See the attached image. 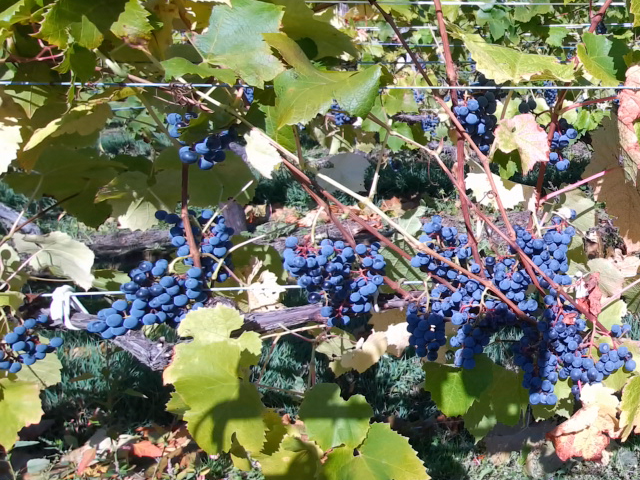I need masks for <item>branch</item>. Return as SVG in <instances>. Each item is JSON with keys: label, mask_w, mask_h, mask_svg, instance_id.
Here are the masks:
<instances>
[{"label": "branch", "mask_w": 640, "mask_h": 480, "mask_svg": "<svg viewBox=\"0 0 640 480\" xmlns=\"http://www.w3.org/2000/svg\"><path fill=\"white\" fill-rule=\"evenodd\" d=\"M283 164L288 169L291 170V173L293 174L295 179L301 184L303 191L306 194H308L310 197L314 198L318 206L320 207V209L324 211L332 219V221L335 223L340 233L343 235L344 239L352 247H355L357 245V242L351 236V234L349 233V231L347 230V228L345 227L341 219L338 217V215L335 212H333L328 205H326L322 196L325 199L331 201L341 213H347L350 217H352L360 228H363L367 230L369 233H371L372 235H375L381 240H384L397 254L404 256L408 260H411L413 258V255L409 251H407L405 248L400 247L392 237L380 231L378 228H375L371 224L363 221L361 216L356 211H354L351 207L347 206L346 204H342V202L335 195L329 193L315 180H313L311 177H309L305 173L301 172L299 168L290 160L285 159L283 161Z\"/></svg>", "instance_id": "325d2c04"}, {"label": "branch", "mask_w": 640, "mask_h": 480, "mask_svg": "<svg viewBox=\"0 0 640 480\" xmlns=\"http://www.w3.org/2000/svg\"><path fill=\"white\" fill-rule=\"evenodd\" d=\"M545 167H546V161L542 160L541 164L539 166V175H538V180H537V184H536L537 194H536L535 207H539V199H540V196H541V187H542V183H543Z\"/></svg>", "instance_id": "1d269e1b"}, {"label": "branch", "mask_w": 640, "mask_h": 480, "mask_svg": "<svg viewBox=\"0 0 640 480\" xmlns=\"http://www.w3.org/2000/svg\"><path fill=\"white\" fill-rule=\"evenodd\" d=\"M610 3H611V0H605L604 1L603 5L601 6L600 10L598 11L596 17L594 18V20H593V22H592V24H591V26L589 28L590 32H593L596 29L598 22L601 20L602 15L604 14L605 10L607 9V7H608V5Z\"/></svg>", "instance_id": "1af6ec82"}, {"label": "branch", "mask_w": 640, "mask_h": 480, "mask_svg": "<svg viewBox=\"0 0 640 480\" xmlns=\"http://www.w3.org/2000/svg\"><path fill=\"white\" fill-rule=\"evenodd\" d=\"M190 90L196 94L199 95L201 98H205L210 102H213L215 105L219 106L221 109H223L224 111H227L228 113H230L236 120L242 122L243 124H246L248 127H250L252 130L256 131L257 133L261 134L263 137H265L271 144L274 145V147L276 149H278L279 151L285 153L291 160L295 161L296 163L300 162V158L297 157L296 155H294L290 150H288L287 148H285L284 146L280 145L278 143L277 140H275L271 135H269L265 130L261 129L259 126L253 124L250 120L244 118L243 116H240L236 111H234L232 108H230L229 106L225 105L224 103H222L221 101H219L218 99H216L215 97L210 96L207 93H203L202 91L198 90L196 87H190Z\"/></svg>", "instance_id": "45aa463d"}, {"label": "branch", "mask_w": 640, "mask_h": 480, "mask_svg": "<svg viewBox=\"0 0 640 480\" xmlns=\"http://www.w3.org/2000/svg\"><path fill=\"white\" fill-rule=\"evenodd\" d=\"M374 6L376 7L377 11L380 13L381 16L385 17L388 22L391 24L394 33L397 34V37L399 39V41L402 43V45L404 46L406 53L408 55V57L410 58V60L412 61V63L415 65V67L417 68V70L419 71V73L421 74V76L423 77V79L425 80L426 84L428 85H433L432 81L430 80L428 74L425 72L424 68L420 65L419 61L417 60V58L414 56L410 45L408 44V42L404 39V36L402 33H399V28L396 24V22L393 20V18L390 16L389 13H387L386 11H384L382 9V6L378 3L375 2Z\"/></svg>", "instance_id": "1ff4a987"}, {"label": "branch", "mask_w": 640, "mask_h": 480, "mask_svg": "<svg viewBox=\"0 0 640 480\" xmlns=\"http://www.w3.org/2000/svg\"><path fill=\"white\" fill-rule=\"evenodd\" d=\"M428 275H429L431 278H434V279L438 280L439 282H441V284H445V285H446V287H448L449 289H451V291H452V292H455V291H456V287H455L454 285L450 284V283H449L447 280H445L444 278H441V277H439V276L434 275V272H433V271H429V272H428Z\"/></svg>", "instance_id": "2b1400db"}, {"label": "branch", "mask_w": 640, "mask_h": 480, "mask_svg": "<svg viewBox=\"0 0 640 480\" xmlns=\"http://www.w3.org/2000/svg\"><path fill=\"white\" fill-rule=\"evenodd\" d=\"M384 281L388 283V286L390 288H394L401 298L405 300H408L410 298V294L408 292H405L403 288L399 285V283L391 276H386L384 278Z\"/></svg>", "instance_id": "ca6c30ca"}, {"label": "branch", "mask_w": 640, "mask_h": 480, "mask_svg": "<svg viewBox=\"0 0 640 480\" xmlns=\"http://www.w3.org/2000/svg\"><path fill=\"white\" fill-rule=\"evenodd\" d=\"M566 98H567V90H562V93L559 96L558 101H557V103L555 105V108H554V113L555 114L552 116V119H551V126H550L549 133H548V141L549 142H553L554 141L553 135H554V132H555V129H556V121H557V119L560 118V112H561V109H562V107H563V105H564V103L566 101Z\"/></svg>", "instance_id": "ea751061"}, {"label": "branch", "mask_w": 640, "mask_h": 480, "mask_svg": "<svg viewBox=\"0 0 640 480\" xmlns=\"http://www.w3.org/2000/svg\"><path fill=\"white\" fill-rule=\"evenodd\" d=\"M433 96L436 99V101L438 102V104L440 105V107L443 109V111L446 113V115L453 120V123L455 124V126L457 127V130L461 134V135H459L457 137L456 179L454 178L453 173L450 172V170H449L448 166L445 164V162L440 158L439 153L436 152L435 150H433L430 146H427L425 144H422L421 142H418V141H415L413 139H410L409 137H406V136H404L402 134H399L395 130L388 128L382 121H380L378 118H376L371 112H368L367 116L376 125H378L385 133L391 134L395 138L400 139L401 141H404V142H406V143H408L410 145H413L415 147H418V148H420L422 150L427 151L430 155H432L435 158L436 162L444 170V172H445L446 176L449 178L453 188L457 192L458 201H459L461 209H462V216L464 217V227H465V231H466L467 237H468V245L472 249L473 258H474L475 262L478 265L479 274L466 270L465 268L457 265L455 262L445 258L443 255L439 254L435 250L427 247L418 238L414 237L411 233H409L406 229H404L398 223H396L395 221L387 218L382 213V211L377 207V205L373 201H371L369 198L352 192L345 185L341 184L340 182L334 180L333 178H331L330 176H328V175H326L324 173L318 172L314 167H312L309 164H304L303 168L308 170V171H310L315 177H319L321 179H324L327 182H329L330 184L334 185L335 187L341 189L344 193L348 194L350 197H352L354 199H357L359 201H362V202L366 203L367 205L371 206L373 211L378 215V217L382 221H384L386 224L391 225L393 228L398 230L405 237H407L409 240L414 242L420 249H422L423 251H425V252L431 254L432 256L436 257L438 260H441L443 263L451 266L456 271H458V272H460V273H462V274H464V275H466L468 277H472V278L478 280L483 285H486L498 297H500L504 301H506L507 304L509 305V307L512 310L515 311V313L517 314V316L519 318H521L524 321H528L529 317L526 316L525 313L523 311H521L519 309V307L513 303V301L511 300V298L509 296H506L504 293H502L500 290H498L494 286L493 283H491L490 281L482 278V276L484 275V266H483L482 260L478 256V253H477L478 252L477 241L475 240V236L472 234V230H471L472 229V225L469 223V216L467 215L469 213V207L473 208V210L478 213L479 218L486 224V226L489 227L491 230H493L496 234H498L503 240H505L509 244V246L521 257L522 264L524 265V267H525V269H526V271H527V273H528V275H529L534 287L536 288V290L539 292V294L541 296H545L546 292L544 291V289L541 287V285L539 284L538 280L536 279V277H535V275H534V273L532 271V268L535 271H537L550 285H552L555 290H558V292L565 298V300L569 304H571L572 307H574L578 312H580L582 315H584L598 329L602 330L604 333H607L608 329H607L606 326L601 324L595 317H593L584 308H582L578 303H576L570 297V295L563 289V287L559 283H555L552 279H550L549 276L542 269H540L538 266H536L532 262V260L523 251H521V249L517 246V240L515 239V232H514L512 226H511L509 218H508V216H507V214L505 212V209L503 207L501 198L499 196V192L496 190L495 183L493 181V175H492V173L490 171L489 164L487 162L486 157L484 156V153L481 151V149L479 148L477 143L466 134V132L464 131V128L462 127V125L459 122V119L446 106V104L444 103V101L442 100L440 95L438 94L437 90L433 91ZM464 140L467 141L473 147V149L475 150V152L477 153V155L479 156V158L482 161V164L484 166V171H485L486 176L488 178V183L490 185L491 192L494 194V198H495L496 204L498 206V210H499V212L501 214V217H502V219L504 221V224H505V227H506V229H507V231L509 233V236H507L502 230L498 229L494 224H492L484 216V213L481 210V208L478 207L475 203H473L472 200L464 193V177H463Z\"/></svg>", "instance_id": "30e6481e"}, {"label": "branch", "mask_w": 640, "mask_h": 480, "mask_svg": "<svg viewBox=\"0 0 640 480\" xmlns=\"http://www.w3.org/2000/svg\"><path fill=\"white\" fill-rule=\"evenodd\" d=\"M433 11L435 12V17L437 19V23H438L439 30H440L441 51L443 52L444 60L446 61V65H447V68H448V83L450 85H454L456 83V80H455V66H454V63H453V59L451 57L450 50L448 48V34H447L446 23L444 21V16L442 14V10H441L440 4L438 2H435L433 4Z\"/></svg>", "instance_id": "982ccf7c"}, {"label": "branch", "mask_w": 640, "mask_h": 480, "mask_svg": "<svg viewBox=\"0 0 640 480\" xmlns=\"http://www.w3.org/2000/svg\"><path fill=\"white\" fill-rule=\"evenodd\" d=\"M188 165H181V208L180 214L183 220L185 237L188 240L190 255L196 267L201 265L200 257L197 253L195 237L192 234L190 218L188 215Z\"/></svg>", "instance_id": "170604dd"}]
</instances>
